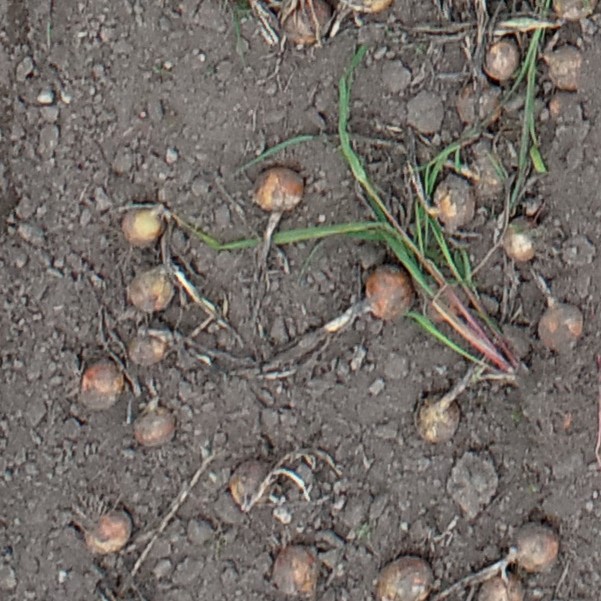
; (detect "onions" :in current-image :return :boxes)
[415,389,462,442]
[121,205,161,245]
[230,460,267,509]
[281,6,319,48]
[501,225,535,261]
[127,267,173,312]
[132,406,174,448]
[76,360,124,411]
[127,327,172,365]
[458,78,499,123]
[549,91,581,123]
[79,510,125,554]
[422,276,467,315]
[475,573,526,601]
[374,554,435,600]
[482,38,518,79]
[428,178,474,226]
[342,0,391,15]
[510,522,557,570]
[474,168,505,212]
[251,167,302,212]
[360,265,413,319]
[545,44,581,89]
[267,545,321,595]
[532,304,583,353]
[551,0,599,18]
